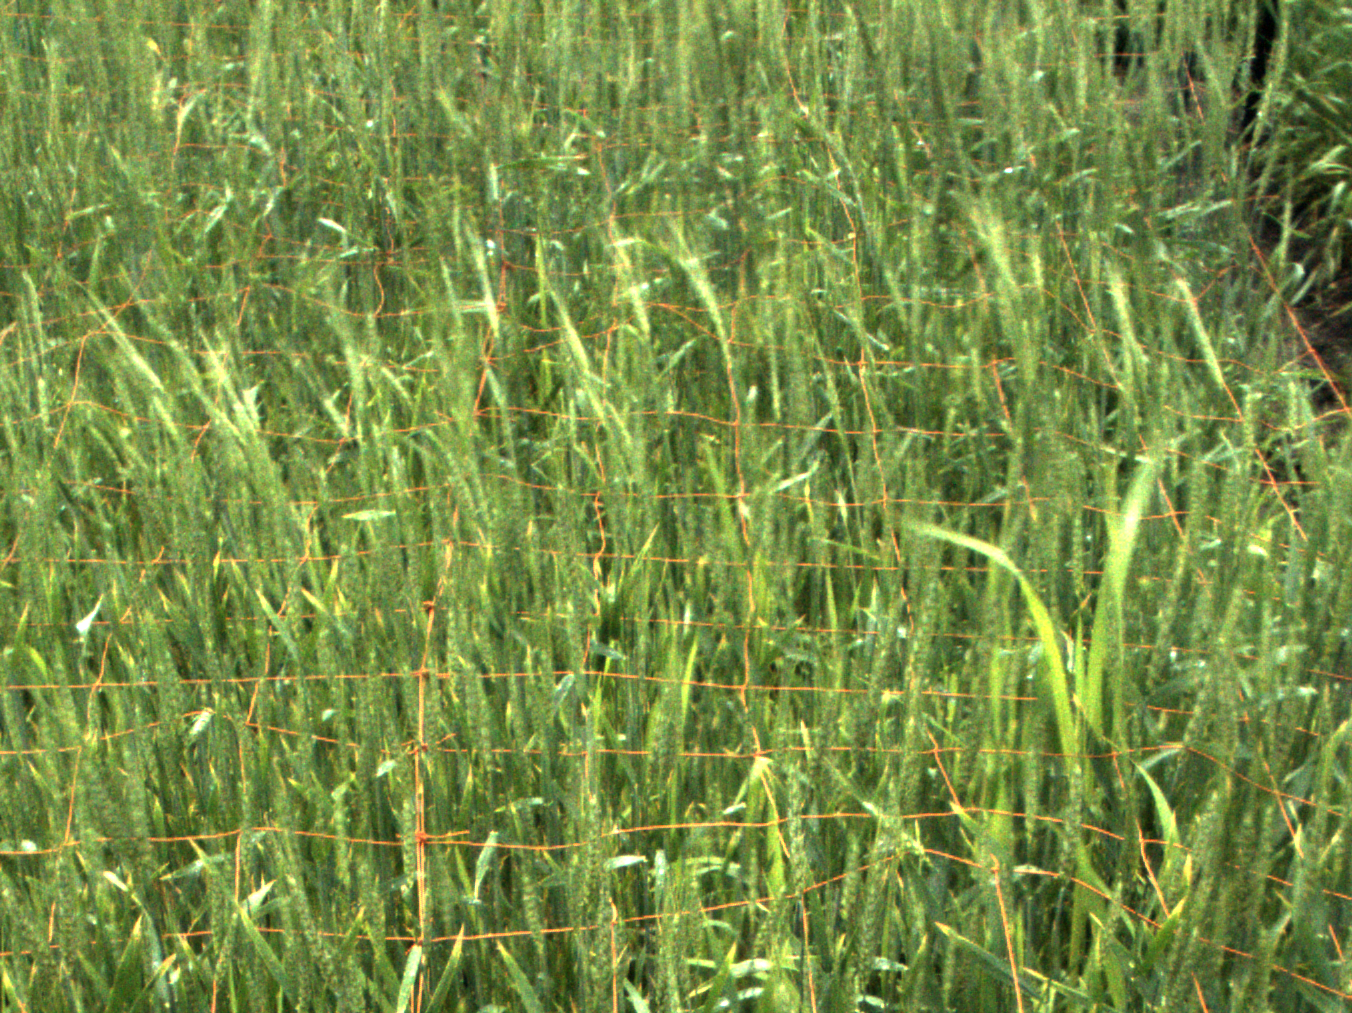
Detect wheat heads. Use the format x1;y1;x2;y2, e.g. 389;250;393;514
418;55;434;112
664;384;677;417
252;674;276;741
933;16;958;104
1168;439;1181;489
798;43;811;101
121;548;145;604
694;280;732;359
752;884;786;952
1102;34;1118;102
465;610;493;674
424;495;447;581
0;743;15;817
766;364;782;418
564;601;585;686
0;143;15;209
152;727;180;793
428;208;440;292
1004;617;1030;694
1246;809;1275;920
1097;879;1125;968
418;1;442;76
699;502;718;566
167;334;200;380
540;647;554;721
633;476;659;545
1177;386;1194;434
741;707;755;756
1063;450;1082;509
288;253;310;338
85;422;122;471
1020;744;1042;840
848;305;871;350
1139;33;1165;114
429;331;454;382
317;627;352;711
620;46;639;117
889;919;902;988
1220;466;1237;546
908;219;923;283
896;25;915;96
522;870;545;950
867;64;895;140
513;13;530;93
259;79;270;126
291;935;316;1011
155;123;173;185
1163;852;1189;910
494;393;517;448
247;950;266;992
499;305;528;341
100;4;127;75
736;384;757;479
1123;127;1145;190
365;640;389;731
1268;679;1301;767
13;340;29;383
397;797;416;896
1069;514;1088;600
1277;199;1292;264
33;948;63;1011
1161;3;1176;54
299;16;330;89
841;88;860;150
1313;692;1334;745
53;855;80;978
707;545;727;632
132;483;180;559
216;907;238;991
881;497;896;548
787;760;813;905
507;682;529;778
358;857;388;946
444;608;465;692
485;160;500;205
1108;127;1131;197
236;782;255;878
152;394;183;441
370;4;392;75
670;336;699;364
1170;916;1212;1013
344;0;366;57
152;656;172;728
773;230;787;301
333;57;368;137
1345;599;1352;674
48;85;64;137
207;405;247;441
587;904;617;995
899;719;928;810
1204;615;1235;756
997;851;1016;926
385;538;405;606
479;293;501;337
370;421;386;477
862;801;933;860
879;775;906;840
403;525;431;603
886;116;909;195
0;886;52;956
1334;819;1347;874
214;85;224;138
1240;938;1271;1013
523;664;549;741
1162;910;1193;987
645;29;667;114
340;149;365;241
1100;558;1122;682
201;576;215;632
0;413;23;458
464;458;489;528
753;276;770;316
1243;1;1257;60
1047;512;1064;626
328;790;354;887
0;353;27;408
1101;264;1120;384
255;500;273;580
284;870;345;995
1026;316;1048;374
238;472;255;527
909;284;925;340
1272;19;1290;82
748;487;765;549
876;921;889;993
781;309;795;360
144;403;162;451
551;481;588;590
844;699;865;778
392;148;406;217
1087;400;1100;451
994;278;1021;342
283;537;303;640
810;497;830;567
577;6;594;109
746;844;759;923
171;935;205;1013
540;16;561;84
21;269;44;327
231;394;267;444
953;3;974;96
604;473;633;564
95;519;121;582
420;449;442;501
970;345;987;407
143;557;157;594
281;5;299;77
207;871;226;954
462;659;481;742
601;398;633;449
331;719;352;757
7;921;30;994
305;94;324;190
752;0;774;47
1203;98;1231;179
245;71;260;126
351;738;373;832
555;61;572;118
14;767;42;824
792;278;820;332
275;851;299;970
191;228;212;299
717;47;739;144
390;443;404;505
656;720;684;780
1012;402;1025;441
2;688;26;759
246;272;268;326
71;39;95;101
1256;151;1277;199
1182;788;1218;881
837;839;864;923
130;703;156;789
673;34;689;137
355;441;370;501
953;706;986;789
1145;551;1188;690
634;631;650;706
775;722;788;775
39;706;63;787
119;443;151;472
205;410;231;506
633;226;647;277
444;449;483;529
1054;8;1078;80
566;397;578;441
31;165;58;220
267;480;287;554
224;479;240;536
962;422;979;475
671;966;689;1013
438;258;468;332
821;371;843;423
123;750;153;853
942;407;956;453
584;711;597;743
674;879;703;946
1002;439;1025;503
1024;0;1047;57
822;130;858;200
110;376;140;425
1323;461;1347;556
1240;390;1259;462
1226;811;1260;942
240;963;265;1013
1076;43;1089;114
860;469;874;541
991;15;1022;73
293;730;319;768
949;122;970;185
435;87;478;141
14;495;35;559
955;592;1004;685
702;777;726;849
508;486;531;568
496;97;517;166
971;278;989;338
842;21;859;106
1334;920;1352;1004
363;532;388;613
163;647;185;722
135;50;156;126
1054;763;1086;890
577;814;603;918
772;0;792;74
1026;250;1047;303
1029;470;1066;558
789;352;816;422
1007;64;1033;142
194;29;213;103
1287;378;1303;439
256;0;276;56
353;694;369;734
342;345;363;410
450;194;463;258
29;494;50;565
37;375;54;431
1188;850;1219;927
580;375;610;429
431;847;458;935
626;283;653;341
905;524;926;601
654;950;672;1012
1153;361;1171;418
223;619;248;670
990;223;1009;255
183;513;200;584
644;707;668;778
219;688;257;743
1193;312;1225;388
125;347;160;391
334;542;369;616
23;332;40;372
80;755;144;869
900;580;949;695
682;506;704;583
849;5;880;56
321;395;351;439
562;317;592;372
854;863;887;986
377;82;393;173
363;307;382;390
1194;40;1226;110
0;25;26;114
1319;480;1352;665
862;609;900;724
1002;511;1026;557
790;521;806;567
1184;586;1243;747
383;706;415;778
212;294;239;339
941;927;959;1003
756;125;788;218
186;68;211;137
428;654;443;719
921;489;944;555
1296;800;1327;896
43;130;71;209
1252;79;1276;146
476;696;498;778
13;560;36;612
525;514;551;593
1189;939;1224;1013
53;660;88;756
227;587;249;641
884;269;909;330
346;954;366;1013
1127;708;1145;763
975;226;1025;298
1172;15;1188;61
512;795;536;842
91;43;112;110
976;68;1002;135
202;635;221;695
806;692;837;784
762;489;781;551
773;508;790;575
484;503;517;583
123;31;139;98
1037;405;1069;496
50;518;68;563
413;115;435;172
400;658;426;733
1186;457;1204;529
492;11;513;72
246;541;262;599
176;441;212;554
1256;596;1272;687
755;678;769;724
418;693;440;761
978;6;998;74
1109;282;1150;378
688;15;718;142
